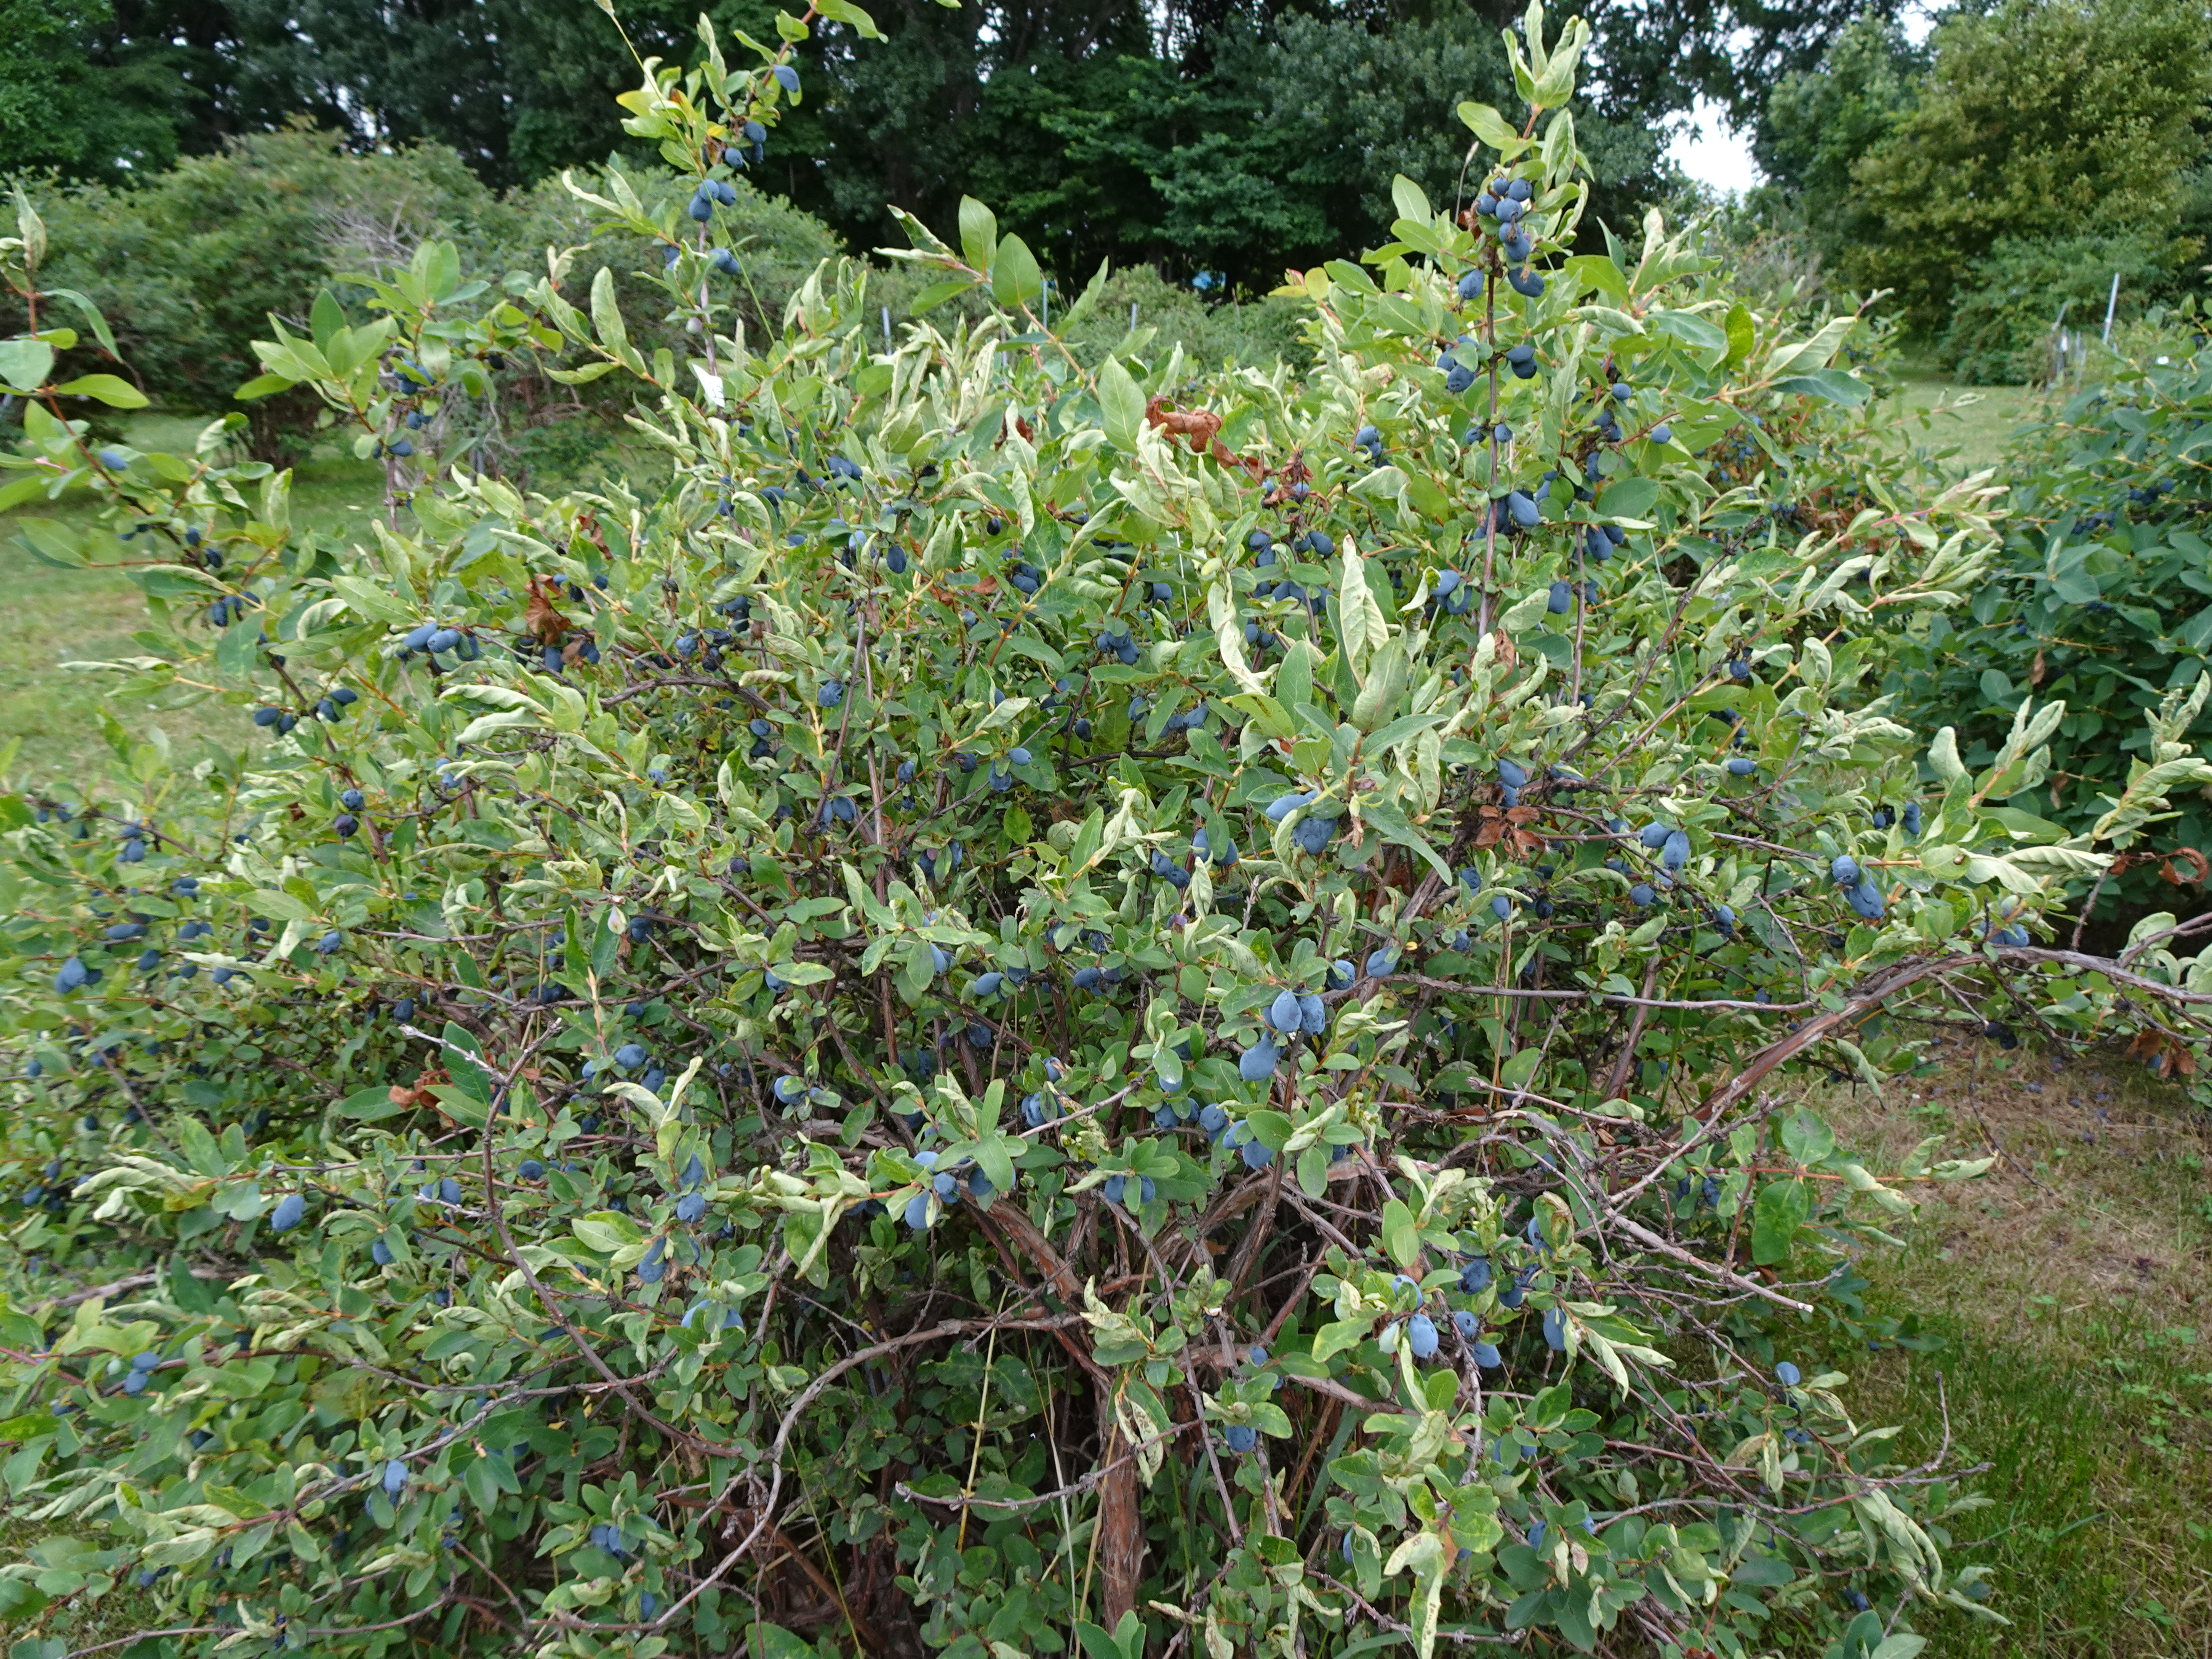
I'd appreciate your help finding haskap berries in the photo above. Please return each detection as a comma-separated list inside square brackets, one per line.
[1447, 361, 1480, 392]
[1578, 1514, 1595, 1535]
[723, 1221, 732, 1236]
[1224, 1421, 1256, 1452]
[1508, 266, 1544, 298]
[1153, 581, 1172, 600]
[1042, 982, 1052, 993]
[1612, 383, 1630, 401]
[207, 1605, 227, 1618]
[1763, 1539, 1777, 1549]
[1208, 616, 1211, 621]
[1271, 988, 1302, 1034]
[1707, 709, 1716, 719]
[1325, 958, 1355, 990]
[587, 646, 600, 665]
[227, 966, 242, 975]
[2003, 923, 2030, 946]
[1984, 1021, 2004, 1039]
[1651, 427, 1671, 444]
[1040, 697, 1064, 712]
[1527, 1520, 1547, 1551]
[166, 971, 177, 981]
[1021, 1094, 1032, 1114]
[1341, 1374, 1351, 1385]
[224, 594, 242, 612]
[1831, 855, 1859, 885]
[841, 1200, 867, 1216]
[414, 1160, 425, 1170]
[1586, 524, 1612, 560]
[1461, 534, 1474, 541]
[278, 713, 297, 732]
[987, 761, 1012, 792]
[1434, 1502, 1460, 1520]
[441, 773, 461, 787]
[1602, 523, 1624, 544]
[1535, 898, 1554, 920]
[702, 647, 727, 673]
[46, 1160, 61, 1178]
[698, 179, 719, 201]
[841, 547, 858, 567]
[636, 1234, 672, 1283]
[49, 1190, 60, 1201]
[422, 990, 439, 1004]
[1562, 772, 1585, 793]
[1733, 737, 1743, 748]
[1072, 513, 1089, 522]
[1090, 982, 1108, 995]
[242, 1121, 252, 1134]
[28, 1256, 47, 1275]
[130, 886, 139, 897]
[1540, 1152, 1556, 1173]
[1506, 491, 1539, 526]
[662, 1101, 683, 1121]
[1136, 563, 1147, 571]
[730, 858, 747, 873]
[640, 1591, 656, 1622]
[720, 258, 741, 275]
[136, 948, 161, 972]
[1438, 1015, 1454, 1038]
[1490, 895, 1510, 921]
[118, 822, 142, 838]
[764, 969, 789, 994]
[1177, 728, 1185, 733]
[1495, 781, 1519, 807]
[568, 581, 584, 602]
[146, 1043, 160, 1054]
[759, 486, 784, 504]
[921, 915, 930, 928]
[452, 1503, 460, 1514]
[257, 1109, 268, 1125]
[1242, 1140, 1274, 1169]
[1201, 701, 1208, 707]
[682, 650, 693, 658]
[367, 1000, 381, 1021]
[720, 698, 736, 709]
[1294, 816, 1338, 855]
[120, 530, 137, 541]
[1585, 585, 1598, 603]
[575, 1262, 587, 1277]
[953, 751, 978, 773]
[421, 857, 429, 867]
[273, 1634, 284, 1650]
[713, 702, 720, 708]
[1476, 194, 1495, 214]
[55, 803, 76, 822]
[1014, 563, 1022, 575]
[37, 811, 50, 823]
[1716, 707, 1741, 723]
[810, 1086, 823, 1099]
[412, 645, 430, 653]
[1007, 950, 1031, 983]
[1572, 391, 1580, 403]
[417, 367, 434, 384]
[1760, 1484, 1770, 1495]
[1193, 829, 1210, 863]
[139, 1571, 158, 1588]
[1053, 1091, 1073, 1117]
[532, 984, 549, 1003]
[90, 889, 104, 898]
[447, 988, 461, 1001]
[128, 840, 145, 862]
[1318, 585, 1333, 609]
[1150, 608, 1160, 623]
[1144, 638, 1150, 642]
[604, 1176, 612, 1191]
[1608, 818, 1629, 833]
[317, 931, 340, 954]
[783, 426, 801, 441]
[372, 1239, 394, 1265]
[798, 1300, 808, 1309]
[1204, 1314, 1212, 1321]
[170, 877, 198, 889]
[483, 1001, 490, 1008]
[534, 1220, 541, 1226]
[1847, 880, 1884, 919]
[277, 1614, 286, 1623]
[1111, 552, 1126, 559]
[1165, 865, 1190, 888]
[427, 629, 459, 654]
[1184, 1098, 1199, 1123]
[180, 960, 198, 977]
[1632, 364, 1637, 370]
[716, 183, 735, 205]
[589, 1524, 608, 1547]
[921, 464, 939, 477]
[814, 477, 825, 488]
[578, 641, 591, 656]
[404, 622, 437, 647]
[1089, 536, 1107, 548]
[714, 604, 724, 615]
[931, 940, 946, 975]
[1447, 336, 1477, 350]
[1904, 816, 1920, 834]
[269, 651, 285, 669]
[125, 909, 155, 925]
[428, 657, 441, 676]
[845, 458, 862, 479]
[445, 1512, 465, 1531]
[653, 653, 675, 669]
[1654, 869, 1673, 887]
[862, 1198, 889, 1216]
[1378, 1321, 1400, 1355]
[513, 1440, 530, 1457]
[750, 739, 769, 756]
[1616, 725, 1622, 734]
[457, 1471, 466, 1479]
[1002, 548, 1025, 562]
[736, 428, 744, 437]
[548, 954, 559, 966]
[1199, 1103, 1225, 1131]
[811, 1017, 821, 1028]
[1697, 1401, 1716, 1420]
[1522, 957, 1535, 975]
[1562, 474, 1596, 502]
[631, 907, 654, 927]
[1392, 1274, 1424, 1310]
[1293, 535, 1311, 552]
[1504, 236, 1530, 259]
[549, 1160, 563, 1168]
[23, 1185, 42, 1206]
[483, 593, 488, 597]
[193, 1428, 214, 1449]
[1143, 586, 1155, 603]
[439, 1426, 453, 1438]
[1401, 591, 1409, 598]
[255, 707, 277, 726]
[73, 825, 89, 838]
[1447, 585, 1471, 615]
[1782, 802, 1789, 808]
[1678, 1173, 1693, 1195]
[384, 832, 393, 846]
[490, 974, 507, 990]
[615, 1044, 646, 1070]
[1662, 829, 1690, 871]
[334, 813, 360, 838]
[788, 534, 807, 546]
[1212, 836, 1238, 866]
[1019, 559, 1040, 583]
[486, 1227, 492, 1234]
[1156, 722, 1169, 738]
[787, 540, 799, 547]
[1292, 482, 1310, 497]
[385, 1460, 409, 1492]
[1903, 802, 1921, 820]
[1182, 706, 1208, 730]
[554, 931, 565, 944]
[508, 1216, 516, 1223]
[1046, 922, 1073, 953]
[1606, 859, 1622, 873]
[1076, 718, 1091, 742]
[240, 591, 261, 608]
[1521, 1429, 1536, 1455]
[1183, 629, 1189, 636]
[945, 682, 953, 690]
[103, 923, 148, 939]
[869, 821, 876, 830]
[187, 1062, 208, 1075]
[847, 604, 857, 618]
[944, 840, 963, 872]
[796, 468, 809, 485]
[393, 997, 415, 1023]
[634, 846, 649, 859]
[1114, 541, 1129, 548]
[582, 1060, 597, 1084]
[1450, 930, 1470, 951]
[607, 1526, 627, 1556]
[431, 1254, 451, 1265]
[1357, 442, 1383, 461]
[1846, 1587, 1869, 1610]
[204, 547, 222, 568]
[483, 1445, 502, 1457]
[689, 194, 712, 222]
[934, 1172, 956, 1194]
[902, 796, 914, 810]
[1586, 578, 1598, 589]
[1042, 1056, 1063, 1083]
[541, 644, 565, 675]
[719, 1307, 744, 1331]
[1075, 928, 1093, 941]
[440, 1178, 460, 1205]
[178, 922, 197, 939]
[1603, 425, 1621, 442]
[1395, 568, 1402, 579]
[500, 1100, 509, 1113]
[456, 636, 479, 661]
[1533, 871, 1543, 881]
[662, 246, 679, 260]
[392, 360, 417, 380]
[1572, 546, 1591, 567]
[808, 627, 814, 634]
[1728, 759, 1756, 776]
[1580, 694, 1595, 710]
[1002, 617, 1020, 630]
[1155, 1102, 1180, 1131]
[125, 1106, 144, 1124]
[745, 144, 763, 163]
[1345, 1041, 1358, 1056]
[1656, 934, 1667, 945]
[171, 516, 188, 536]
[1257, 629, 1277, 649]
[567, 628, 587, 643]
[215, 1577, 226, 1590]
[1286, 494, 1306, 513]
[1219, 717, 1223, 727]
[514, 638, 534, 666]
[83, 1112, 99, 1130]
[1873, 811, 1885, 828]
[1681, 1424, 1697, 1443]
[1774, 1361, 1800, 1386]
[1053, 678, 1070, 694]
[1289, 581, 1305, 599]
[1262, 480, 1275, 497]
[1244, 527, 1272, 550]
[516, 1160, 543, 1181]
[330, 688, 359, 704]
[1429, 570, 1460, 599]
[968, 1167, 994, 1195]
[601, 1544, 613, 1553]
[564, 1161, 580, 1174]
[263, 1558, 271, 1573]
[174, 887, 199, 903]
[1452, 664, 1463, 687]
[224, 980, 231, 991]
[77, 1175, 92, 1187]
[744, 121, 766, 144]
[913, 1150, 940, 1172]
[633, 655, 652, 671]
[958, 1427, 966, 1435]
[417, 408, 432, 425]
[1639, 819, 1674, 847]
[1635, 1061, 1645, 1077]
[1222, 1118, 1255, 1149]
[1459, 270, 1484, 299]
[940, 950, 951, 969]
[1563, 902, 1574, 911]
[869, 544, 876, 559]
[904, 1111, 924, 1129]
[28, 1060, 41, 1077]
[1437, 344, 1456, 371]
[902, 1190, 936, 1234]
[1630, 884, 1655, 906]
[773, 505, 780, 515]
[391, 1183, 398, 1192]
[1474, 1340, 1501, 1368]
[510, 1336, 523, 1364]
[764, 926, 770, 936]
[1168, 713, 1183, 730]
[1458, 1258, 1491, 1295]
[273, 1550, 290, 1564]
[493, 587, 512, 605]
[1651, 896, 1665, 905]
[828, 518, 847, 528]
[1374, 457, 1392, 468]
[1248, 1346, 1267, 1365]
[53, 1390, 86, 1415]
[1494, 424, 1513, 443]
[631, 926, 653, 944]
[1517, 489, 1534, 503]
[1219, 885, 1239, 902]
[704, 628, 733, 647]
[253, 1029, 262, 1036]
[1509, 359, 1537, 379]
[730, 417, 755, 430]
[1520, 899, 1536, 910]
[1139, 610, 1149, 619]
[547, 934, 557, 948]
[729, 619, 749, 632]
[388, 440, 414, 456]
[442, 1212, 450, 1221]
[726, 147, 743, 169]
[1424, 603, 1437, 621]
[738, 1069, 752, 1087]
[720, 476, 731, 484]
[331, 1529, 349, 1549]
[1201, 558, 1221, 576]
[606, 1195, 621, 1211]
[1787, 1022, 1799, 1031]
[106, 1046, 118, 1058]
[912, 1045, 932, 1077]
[455, 748, 462, 756]
[986, 516, 1002, 536]
[687, 1236, 699, 1262]
[1309, 530, 1334, 555]
[1549, 579, 1562, 591]
[107, 1358, 122, 1376]
[558, 955, 565, 966]
[36, 1357, 47, 1364]
[250, 917, 270, 931]
[1882, 809, 1890, 825]
[1369, 535, 1382, 545]
[209, 1556, 220, 1568]
[772, 63, 800, 93]
[1702, 1175, 1721, 1209]
[137, 525, 150, 532]
[1261, 498, 1270, 510]
[1577, 724, 1582, 730]
[403, 892, 417, 899]
[373, 443, 382, 459]
[342, 789, 365, 811]
[789, 440, 794, 457]
[434, 1292, 449, 1308]
[1735, 728, 1747, 737]
[720, 1063, 733, 1076]
[1097, 634, 1113, 653]
[1453, 1312, 1479, 1339]
[396, 650, 407, 657]
[1499, 223, 1521, 245]
[1538, 864, 1555, 880]
[156, 1567, 169, 1578]
[973, 972, 1002, 996]
[1788, 710, 1801, 716]
[1437, 595, 1449, 608]
[234, 1328, 255, 1350]
[1304, 790, 1318, 800]
[710, 249, 731, 267]
[271, 1192, 305, 1231]
[1508, 179, 1533, 200]
[248, 932, 260, 942]
[90, 1052, 104, 1066]
[1713, 904, 1735, 925]
[823, 800, 833, 825]
[68, 1026, 82, 1037]
[150, 998, 165, 1012]
[1172, 1039, 1194, 1061]
[881, 504, 897, 516]
[899, 1054, 911, 1077]
[1623, 863, 1633, 873]
[666, 579, 680, 592]
[61, 955, 86, 986]
[32, 1346, 51, 1357]
[619, 1198, 627, 1210]
[1117, 868, 1131, 882]
[1388, 570, 1393, 579]
[682, 1299, 709, 1330]
[1497, 1284, 1522, 1308]
[1128, 697, 1147, 722]
[1154, 598, 1170, 609]
[1391, 576, 1403, 589]
[1593, 410, 1613, 428]
[1495, 178, 1508, 195]
[1457, 1548, 1472, 1559]
[493, 1086, 499, 1100]
[1134, 1174, 1156, 1203]
[1105, 628, 1130, 648]
[723, 594, 748, 611]
[217, 1547, 234, 1568]
[962, 611, 976, 628]
[124, 1370, 148, 1395]
[1159, 1074, 1182, 1090]
[333, 1458, 349, 1478]
[912, 633, 921, 642]
[441, 1535, 460, 1548]
[400, 380, 417, 395]
[1496, 757, 1530, 788]
[904, 1269, 914, 1283]
[640, 1539, 647, 1547]
[1001, 621, 1014, 632]
[675, 635, 697, 653]
[1008, 748, 1031, 765]
[1354, 426, 1380, 445]
[213, 601, 229, 627]
[939, 1030, 955, 1048]
[235, 834, 255, 847]
[1240, 1031, 1281, 1083]
[1540, 1306, 1568, 1352]
[476, 1396, 486, 1406]
[257, 633, 267, 645]
[637, 1514, 660, 1531]
[1366, 946, 1395, 977]
[669, 1192, 679, 1198]
[1715, 921, 1734, 936]
[541, 1326, 565, 1341]
[506, 991, 514, 1000]
[1101, 968, 1126, 984]
[1548, 582, 1572, 614]
[1265, 795, 1313, 822]
[820, 822, 827, 833]
[1026, 1092, 1046, 1128]
[97, 451, 126, 470]
[1601, 361, 1616, 377]
[385, 1197, 401, 1207]
[411, 1359, 426, 1374]
[1551, 839, 1562, 851]
[41, 1198, 65, 1212]
[185, 527, 200, 545]
[88, 903, 114, 917]
[901, 848, 909, 856]
[1272, 580, 1292, 602]
[1247, 617, 1255, 625]
[1278, 1045, 1287, 1056]
[1587, 451, 1605, 483]
[957, 589, 963, 594]
[1116, 640, 1140, 665]
[959, 1156, 970, 1164]
[365, 1481, 399, 1520]
[54, 971, 74, 994]
[924, 1123, 943, 1138]
[775, 1075, 805, 1104]
[1053, 466, 1058, 474]
[1453, 1230, 1488, 1259]
[570, 1094, 583, 1103]
[849, 529, 866, 549]
[1506, 345, 1536, 362]
[94, 1085, 107, 1092]
[550, 984, 563, 1001]
[1071, 962, 1104, 989]
[1502, 520, 1516, 536]
[435, 757, 452, 768]
[918, 849, 935, 875]
[1089, 931, 1105, 953]
[203, 1026, 213, 1038]
[1152, 849, 1173, 876]
[894, 802, 900, 811]
[1245, 624, 1260, 644]
[1344, 1528, 1354, 1564]
[778, 804, 790, 819]
[1331, 1144, 1345, 1163]
[1302, 595, 1319, 614]
[896, 757, 917, 782]
[1466, 426, 1488, 445]
[1581, 799, 1586, 805]
[680, 1152, 704, 1190]
[1481, 496, 1509, 535]
[1061, 716, 1071, 731]
[2146, 1054, 2162, 1068]
[1755, 987, 1772, 1013]
[1979, 919, 2006, 946]
[59, 1185, 70, 1197]
[1543, 471, 1558, 481]
[1408, 1315, 1438, 1358]
[1792, 1430, 1811, 1444]
[488, 353, 505, 370]
[817, 678, 845, 707]
[646, 1054, 666, 1069]
[130, 1353, 166, 1370]
[284, 1634, 303, 1649]
[1262, 1004, 1277, 1029]
[887, 546, 906, 573]
[581, 1111, 602, 1134]
[198, 920, 214, 936]
[593, 574, 609, 591]
[1105, 1173, 1125, 1204]
[865, 719, 872, 727]
[827, 793, 858, 825]
[2001, 894, 2019, 917]
[1252, 541, 1282, 575]
[414, 1232, 421, 1242]
[1564, 500, 1573, 510]
[1536, 481, 1552, 504]
[718, 498, 736, 516]
[1658, 1060, 1668, 1073]
[666, 258, 679, 268]
[623, 1002, 645, 1020]
[1729, 649, 1752, 678]
[880, 648, 888, 663]
[2001, 1034, 2018, 1050]
[1474, 525, 1486, 540]
[212, 967, 232, 983]
[735, 604, 752, 620]
[1527, 1216, 1552, 1256]
[318, 700, 341, 722]
[1459, 867, 1482, 889]
[1867, 1341, 1880, 1352]
[1297, 989, 1329, 1037]
[952, 659, 957, 667]
[1347, 862, 1370, 874]
[647, 769, 665, 790]
[685, 626, 698, 637]
[1470, 887, 1481, 897]
[1549, 762, 1564, 778]
[828, 454, 851, 476]
[1493, 1437, 1513, 1473]
[116, 847, 129, 863]
[1828, 927, 1847, 949]
[406, 411, 422, 430]
[678, 1191, 705, 1222]
[1518, 1264, 1539, 1285]
[1889, 807, 1896, 824]
[85, 968, 103, 987]
[638, 1062, 665, 1091]
[1273, 1377, 1284, 1389]
[1782, 1427, 1799, 1440]
[1214, 734, 1221, 740]
[968, 1022, 992, 1046]
[553, 575, 568, 588]
[930, 911, 939, 921]
[1496, 200, 1522, 222]
[1013, 575, 1038, 593]
[1460, 556, 1474, 574]
[180, 1028, 194, 1043]
[1167, 914, 1187, 929]
[940, 1181, 962, 1203]
[419, 1182, 439, 1204]
[749, 719, 771, 736]
[1207, 1124, 1225, 1146]
[1009, 1165, 1016, 1191]
[399, 654, 409, 663]
[619, 1076, 629, 1082]
[995, 687, 1005, 708]
[1252, 581, 1271, 599]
